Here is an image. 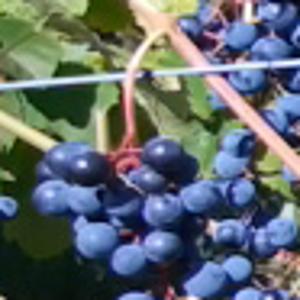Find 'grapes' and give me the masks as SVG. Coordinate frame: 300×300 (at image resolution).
<instances>
[{"label":"grapes","mask_w":300,"mask_h":300,"mask_svg":"<svg viewBox=\"0 0 300 300\" xmlns=\"http://www.w3.org/2000/svg\"><path fill=\"white\" fill-rule=\"evenodd\" d=\"M227 83L242 97H253L263 92L269 84V71L257 69L245 72H227Z\"/></svg>","instance_id":"obj_7"},{"label":"grapes","mask_w":300,"mask_h":300,"mask_svg":"<svg viewBox=\"0 0 300 300\" xmlns=\"http://www.w3.org/2000/svg\"><path fill=\"white\" fill-rule=\"evenodd\" d=\"M205 95L208 97L211 107L217 112H225L228 105L223 99L217 97V94L212 90H207Z\"/></svg>","instance_id":"obj_9"},{"label":"grapes","mask_w":300,"mask_h":300,"mask_svg":"<svg viewBox=\"0 0 300 300\" xmlns=\"http://www.w3.org/2000/svg\"><path fill=\"white\" fill-rule=\"evenodd\" d=\"M255 275L254 261L243 252L194 264L178 281L179 291L191 299L290 300L283 288L248 286Z\"/></svg>","instance_id":"obj_3"},{"label":"grapes","mask_w":300,"mask_h":300,"mask_svg":"<svg viewBox=\"0 0 300 300\" xmlns=\"http://www.w3.org/2000/svg\"><path fill=\"white\" fill-rule=\"evenodd\" d=\"M176 23L195 44L202 40L204 31L218 32L223 25V21L216 14H212V7L206 1L198 7L197 20L192 16H178Z\"/></svg>","instance_id":"obj_6"},{"label":"grapes","mask_w":300,"mask_h":300,"mask_svg":"<svg viewBox=\"0 0 300 300\" xmlns=\"http://www.w3.org/2000/svg\"><path fill=\"white\" fill-rule=\"evenodd\" d=\"M214 239L229 250L249 247L254 256L271 260L279 250L289 252L300 243V230L287 217H272L261 223H246L238 218H225L215 227Z\"/></svg>","instance_id":"obj_4"},{"label":"grapes","mask_w":300,"mask_h":300,"mask_svg":"<svg viewBox=\"0 0 300 300\" xmlns=\"http://www.w3.org/2000/svg\"><path fill=\"white\" fill-rule=\"evenodd\" d=\"M277 87L285 92L275 102V109H261L259 116L266 124L290 139L300 120V69L278 68L271 71Z\"/></svg>","instance_id":"obj_5"},{"label":"grapes","mask_w":300,"mask_h":300,"mask_svg":"<svg viewBox=\"0 0 300 300\" xmlns=\"http://www.w3.org/2000/svg\"><path fill=\"white\" fill-rule=\"evenodd\" d=\"M256 135L228 129L210 160L212 177L175 134L146 141L124 136L103 152L83 140L58 143L34 165L31 212L70 220V249L81 261H106L116 277L135 281L183 264L207 224L247 210L258 197L252 167Z\"/></svg>","instance_id":"obj_1"},{"label":"grapes","mask_w":300,"mask_h":300,"mask_svg":"<svg viewBox=\"0 0 300 300\" xmlns=\"http://www.w3.org/2000/svg\"><path fill=\"white\" fill-rule=\"evenodd\" d=\"M115 300H158L156 294L153 291L143 288L135 287L120 290Z\"/></svg>","instance_id":"obj_8"},{"label":"grapes","mask_w":300,"mask_h":300,"mask_svg":"<svg viewBox=\"0 0 300 300\" xmlns=\"http://www.w3.org/2000/svg\"><path fill=\"white\" fill-rule=\"evenodd\" d=\"M223 49L253 60L300 58V0H262L257 21L239 19L220 35Z\"/></svg>","instance_id":"obj_2"}]
</instances>
